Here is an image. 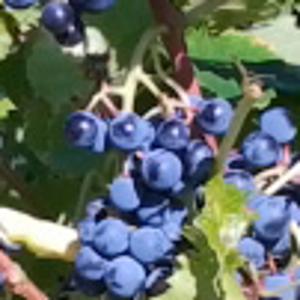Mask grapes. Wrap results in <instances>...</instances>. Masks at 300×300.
Segmentation results:
<instances>
[{"mask_svg":"<svg viewBox=\"0 0 300 300\" xmlns=\"http://www.w3.org/2000/svg\"><path fill=\"white\" fill-rule=\"evenodd\" d=\"M300 265H296L286 275L282 271L270 272L261 283L265 292L281 291L280 300H300Z\"/></svg>","mask_w":300,"mask_h":300,"instance_id":"grapes-6","label":"grapes"},{"mask_svg":"<svg viewBox=\"0 0 300 300\" xmlns=\"http://www.w3.org/2000/svg\"><path fill=\"white\" fill-rule=\"evenodd\" d=\"M194 105L192 125L199 132L213 136H224L232 127L235 117V103L229 98L189 97Z\"/></svg>","mask_w":300,"mask_h":300,"instance_id":"grapes-5","label":"grapes"},{"mask_svg":"<svg viewBox=\"0 0 300 300\" xmlns=\"http://www.w3.org/2000/svg\"><path fill=\"white\" fill-rule=\"evenodd\" d=\"M259 130L248 132L241 138L240 153L232 155L222 175L226 185L235 183L243 193L255 188L251 176L254 171H267L286 155L285 147L299 136V124L290 110L276 104L262 111L258 118Z\"/></svg>","mask_w":300,"mask_h":300,"instance_id":"grapes-2","label":"grapes"},{"mask_svg":"<svg viewBox=\"0 0 300 300\" xmlns=\"http://www.w3.org/2000/svg\"><path fill=\"white\" fill-rule=\"evenodd\" d=\"M117 0H66L48 3L42 11L44 26L65 48H75L85 39L84 14L102 16Z\"/></svg>","mask_w":300,"mask_h":300,"instance_id":"grapes-4","label":"grapes"},{"mask_svg":"<svg viewBox=\"0 0 300 300\" xmlns=\"http://www.w3.org/2000/svg\"><path fill=\"white\" fill-rule=\"evenodd\" d=\"M249 211L257 216L248 236L239 240V248L246 258L252 260L256 269L265 267L268 256L279 268L289 266L293 255L291 221L300 224V203L290 195L266 193L255 194L245 201Z\"/></svg>","mask_w":300,"mask_h":300,"instance_id":"grapes-3","label":"grapes"},{"mask_svg":"<svg viewBox=\"0 0 300 300\" xmlns=\"http://www.w3.org/2000/svg\"><path fill=\"white\" fill-rule=\"evenodd\" d=\"M175 115L153 122L122 111L106 121L101 114L75 111L63 119L72 148L96 155L115 148L129 156L107 197L89 200L78 222L83 247L74 256L72 278L80 296L107 291L131 300L169 277L189 218L187 208H169L170 198L206 185L213 171L208 143L191 137L183 108Z\"/></svg>","mask_w":300,"mask_h":300,"instance_id":"grapes-1","label":"grapes"}]
</instances>
